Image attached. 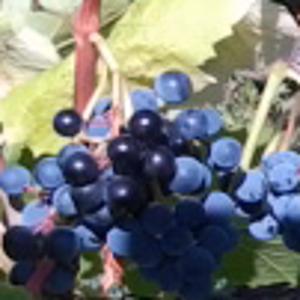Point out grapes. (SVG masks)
<instances>
[{"label": "grapes", "mask_w": 300, "mask_h": 300, "mask_svg": "<svg viewBox=\"0 0 300 300\" xmlns=\"http://www.w3.org/2000/svg\"><path fill=\"white\" fill-rule=\"evenodd\" d=\"M192 84L168 70L152 88H137L96 102L90 118L72 109L56 112L52 127L75 143L38 160L33 173L11 164L0 190L19 197L39 186L48 192L24 205L21 226L5 229L0 246L15 266L11 284L34 272L33 232L46 220L49 258L59 266L47 277L53 296L71 293L72 264L104 242L119 259H134L145 280L170 295L205 299L221 267L224 249L236 245L237 211L248 217L252 238L280 236L300 252V152H272L256 169L241 170L242 140L220 135L216 110L186 109Z\"/></svg>", "instance_id": "01657485"}]
</instances>
